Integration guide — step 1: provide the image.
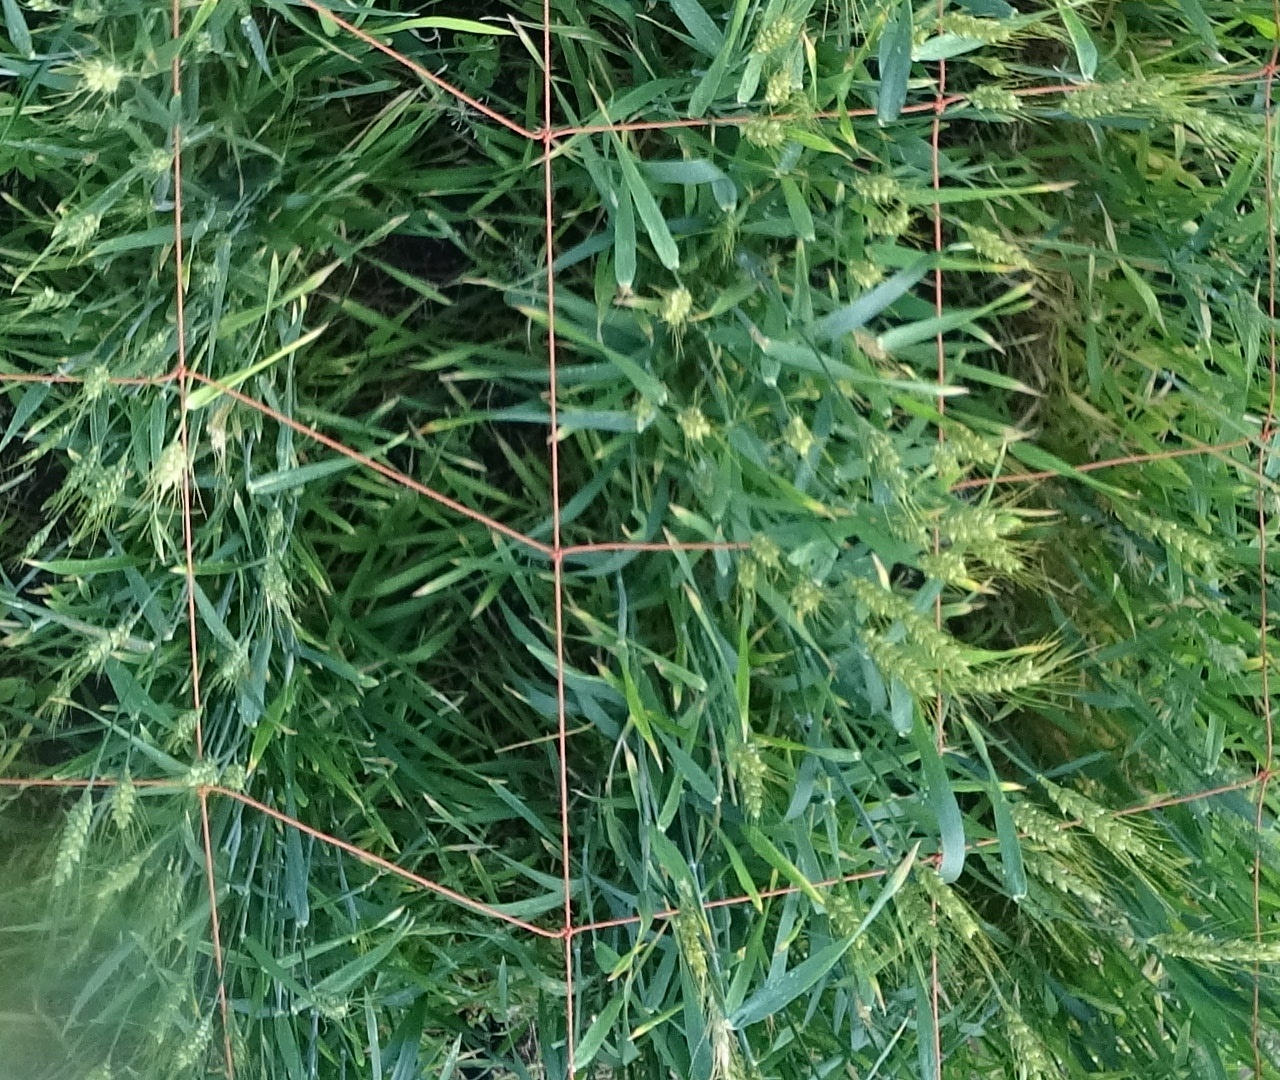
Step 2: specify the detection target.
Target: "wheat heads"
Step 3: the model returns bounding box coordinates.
[1148,928,1280,966]
[266,506,291,537]
[665,285,698,324]
[948,423,1015,470]
[861,432,906,483]
[256,555,288,600]
[68,105,105,130]
[927,12,1011,51]
[850,177,906,197]
[972,659,1056,698]
[159,978,186,1030]
[1157,518,1211,562]
[81,48,127,94]
[114,772,138,828]
[84,624,122,663]
[676,885,706,973]
[195,29,211,54]
[137,325,168,355]
[788,414,815,454]
[927,549,973,582]
[1170,102,1260,148]
[717,208,739,244]
[180,758,208,790]
[75,460,121,523]
[781,579,828,616]
[706,996,725,1035]
[1004,1004,1047,1075]
[672,405,707,439]
[739,117,788,145]
[1020,846,1097,906]
[961,82,1022,111]
[224,638,252,673]
[79,363,109,398]
[856,628,930,697]
[939,507,1006,537]
[48,440,101,500]
[888,870,946,952]
[750,531,778,564]
[43,928,94,978]
[1009,803,1068,846]
[25,525,52,552]
[107,846,144,889]
[853,577,965,669]
[52,792,90,883]
[180,706,202,738]
[52,678,68,723]
[736,551,762,592]
[735,737,763,807]
[967,228,1033,273]
[1060,76,1191,112]
[767,74,793,105]
[909,853,974,932]
[853,324,888,365]
[864,220,910,235]
[54,208,94,255]
[755,14,792,51]
[201,257,223,291]
[27,0,56,15]
[1056,777,1151,859]
[814,889,875,963]
[846,256,880,285]
[147,436,183,493]
[181,1008,212,1060]
[231,1025,248,1063]
[307,982,352,1018]
[73,6,100,23]
[976,535,1012,573]
[26,289,79,307]
[160,870,187,918]
[144,139,170,177]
